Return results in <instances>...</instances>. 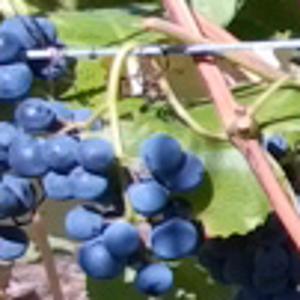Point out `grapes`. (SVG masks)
<instances>
[{"instance_id":"obj_1","label":"grapes","mask_w":300,"mask_h":300,"mask_svg":"<svg viewBox=\"0 0 300 300\" xmlns=\"http://www.w3.org/2000/svg\"><path fill=\"white\" fill-rule=\"evenodd\" d=\"M56 41L46 17L13 16L0 24V101L16 103L13 122H0V219L26 216L37 202L34 181L43 180L51 200L78 199L61 215L60 227L69 239L84 242L76 262L91 281H117L127 267L137 270L140 294L165 297L176 283L167 261L202 245V230L189 219V201L170 199L171 191L199 187L205 167L165 132L142 140L141 157L105 137L64 134L41 143L50 132L93 118L88 107L26 96L36 80H56L74 68L69 56L22 57L26 49Z\"/></svg>"},{"instance_id":"obj_2","label":"grapes","mask_w":300,"mask_h":300,"mask_svg":"<svg viewBox=\"0 0 300 300\" xmlns=\"http://www.w3.org/2000/svg\"><path fill=\"white\" fill-rule=\"evenodd\" d=\"M28 248V235L17 224H0V259L12 262L22 257Z\"/></svg>"}]
</instances>
